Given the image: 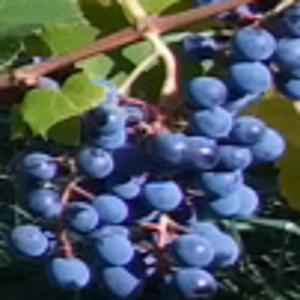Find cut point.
<instances>
[{
	"label": "cut point",
	"instance_id": "6a23745f",
	"mask_svg": "<svg viewBox=\"0 0 300 300\" xmlns=\"http://www.w3.org/2000/svg\"><path fill=\"white\" fill-rule=\"evenodd\" d=\"M146 42L152 46V53L146 59L127 72L121 82V88L129 89L134 79L150 69L160 59L163 62L165 81L161 85L163 94L180 93V62L178 55L169 48L159 34H152Z\"/></svg>",
	"mask_w": 300,
	"mask_h": 300
}]
</instances>
